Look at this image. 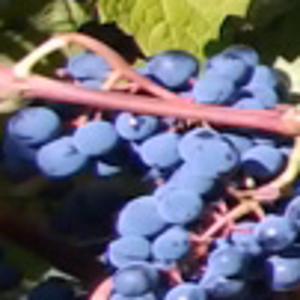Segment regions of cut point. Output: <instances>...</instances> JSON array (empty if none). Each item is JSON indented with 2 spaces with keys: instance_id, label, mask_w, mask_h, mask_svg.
Masks as SVG:
<instances>
[{
  "instance_id": "2",
  "label": "cut point",
  "mask_w": 300,
  "mask_h": 300,
  "mask_svg": "<svg viewBox=\"0 0 300 300\" xmlns=\"http://www.w3.org/2000/svg\"><path fill=\"white\" fill-rule=\"evenodd\" d=\"M300 178V136L293 142V151L290 161L281 175L270 181L265 189L269 197H278L287 194L295 182Z\"/></svg>"
},
{
  "instance_id": "1",
  "label": "cut point",
  "mask_w": 300,
  "mask_h": 300,
  "mask_svg": "<svg viewBox=\"0 0 300 300\" xmlns=\"http://www.w3.org/2000/svg\"><path fill=\"white\" fill-rule=\"evenodd\" d=\"M71 42L82 44L86 49H90L92 52L102 51L108 56L109 61L114 67H124L129 69V66L125 63L123 57L112 45L105 41H101L100 39L93 38L82 31H66L53 34L49 38H46L42 44H39L36 47V50L22 57L15 67V74L18 77H25L28 74L31 65L54 54L64 44Z\"/></svg>"
}]
</instances>
